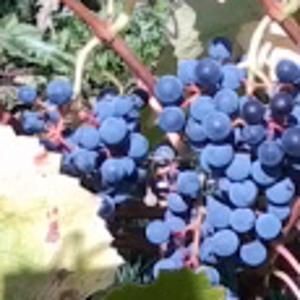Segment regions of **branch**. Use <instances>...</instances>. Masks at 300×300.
Here are the masks:
<instances>
[{
    "label": "branch",
    "mask_w": 300,
    "mask_h": 300,
    "mask_svg": "<svg viewBox=\"0 0 300 300\" xmlns=\"http://www.w3.org/2000/svg\"><path fill=\"white\" fill-rule=\"evenodd\" d=\"M259 5L267 15L286 33L290 41L300 47V23L286 12L275 0H259Z\"/></svg>",
    "instance_id": "2"
},
{
    "label": "branch",
    "mask_w": 300,
    "mask_h": 300,
    "mask_svg": "<svg viewBox=\"0 0 300 300\" xmlns=\"http://www.w3.org/2000/svg\"><path fill=\"white\" fill-rule=\"evenodd\" d=\"M66 7L83 18L85 23L112 49V51L126 61L141 81L147 86L155 84L154 76L144 61L119 38V36L87 6L77 0H68Z\"/></svg>",
    "instance_id": "1"
}]
</instances>
